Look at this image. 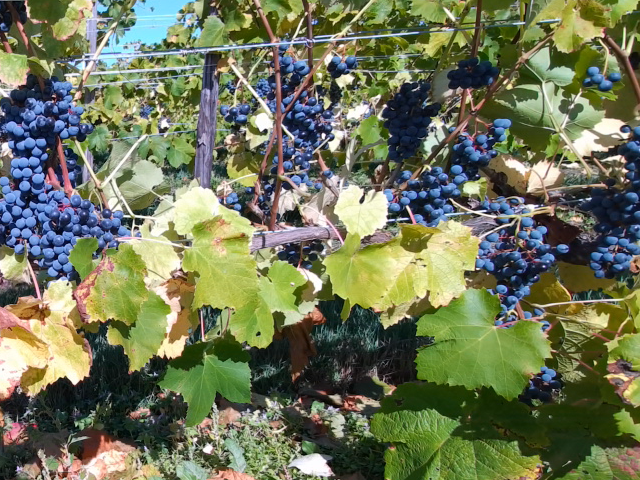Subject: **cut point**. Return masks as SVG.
Instances as JSON below:
<instances>
[{
    "label": "cut point",
    "instance_id": "cut-point-2",
    "mask_svg": "<svg viewBox=\"0 0 640 480\" xmlns=\"http://www.w3.org/2000/svg\"><path fill=\"white\" fill-rule=\"evenodd\" d=\"M99 187H95L92 192L88 195V200H91V198L93 197V195H95V199L98 201L99 204H102V200L100 199V197L98 196V191Z\"/></svg>",
    "mask_w": 640,
    "mask_h": 480
},
{
    "label": "cut point",
    "instance_id": "cut-point-3",
    "mask_svg": "<svg viewBox=\"0 0 640 480\" xmlns=\"http://www.w3.org/2000/svg\"><path fill=\"white\" fill-rule=\"evenodd\" d=\"M241 81H242V77H239V79H238V81H237V83H236V86H235V93H234V96H233V100H236V99H237V96H238V88H239V86H240Z\"/></svg>",
    "mask_w": 640,
    "mask_h": 480
},
{
    "label": "cut point",
    "instance_id": "cut-point-1",
    "mask_svg": "<svg viewBox=\"0 0 640 480\" xmlns=\"http://www.w3.org/2000/svg\"><path fill=\"white\" fill-rule=\"evenodd\" d=\"M596 41L599 42L600 44H602V46L605 48V50H606L605 65H608V62H609V47L600 38H596Z\"/></svg>",
    "mask_w": 640,
    "mask_h": 480
},
{
    "label": "cut point",
    "instance_id": "cut-point-4",
    "mask_svg": "<svg viewBox=\"0 0 640 480\" xmlns=\"http://www.w3.org/2000/svg\"><path fill=\"white\" fill-rule=\"evenodd\" d=\"M303 19H304V12H303V13H302V15L300 16V20H299V22H298V24H297V27H296V30H295V35H298V32H299V30H300V26H301V24H302V22H303Z\"/></svg>",
    "mask_w": 640,
    "mask_h": 480
}]
</instances>
